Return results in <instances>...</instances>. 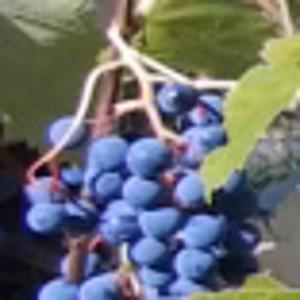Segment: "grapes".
Instances as JSON below:
<instances>
[{
	"mask_svg": "<svg viewBox=\"0 0 300 300\" xmlns=\"http://www.w3.org/2000/svg\"><path fill=\"white\" fill-rule=\"evenodd\" d=\"M149 135L96 138L88 166L42 174L22 187L31 207L23 226L40 241L70 227L101 245L125 243L140 290L150 300H193L195 293L239 290L258 271V227L248 222L259 199L241 170L231 172L204 207L197 172L208 151L226 146L224 98L160 74L149 79Z\"/></svg>",
	"mask_w": 300,
	"mask_h": 300,
	"instance_id": "obj_1",
	"label": "grapes"
},
{
	"mask_svg": "<svg viewBox=\"0 0 300 300\" xmlns=\"http://www.w3.org/2000/svg\"><path fill=\"white\" fill-rule=\"evenodd\" d=\"M100 256L73 250L59 259L60 277L42 283L40 300H119L124 281L115 271L100 270Z\"/></svg>",
	"mask_w": 300,
	"mask_h": 300,
	"instance_id": "obj_2",
	"label": "grapes"
},
{
	"mask_svg": "<svg viewBox=\"0 0 300 300\" xmlns=\"http://www.w3.org/2000/svg\"><path fill=\"white\" fill-rule=\"evenodd\" d=\"M46 140L60 150H73L86 140V126L83 118L74 115L53 120L46 133Z\"/></svg>",
	"mask_w": 300,
	"mask_h": 300,
	"instance_id": "obj_3",
	"label": "grapes"
}]
</instances>
